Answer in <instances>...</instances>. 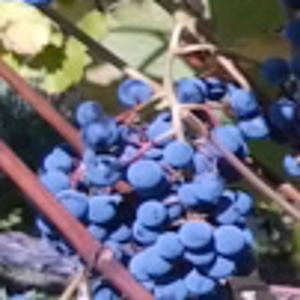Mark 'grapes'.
<instances>
[{"mask_svg": "<svg viewBox=\"0 0 300 300\" xmlns=\"http://www.w3.org/2000/svg\"><path fill=\"white\" fill-rule=\"evenodd\" d=\"M114 96V117L98 100L78 105L83 157L52 146L39 180L155 300H234L227 277L254 239L245 218L254 191L227 187L219 156L204 138L172 130L147 82L121 80Z\"/></svg>", "mask_w": 300, "mask_h": 300, "instance_id": "1", "label": "grapes"}, {"mask_svg": "<svg viewBox=\"0 0 300 300\" xmlns=\"http://www.w3.org/2000/svg\"><path fill=\"white\" fill-rule=\"evenodd\" d=\"M172 92L207 134L240 159L249 156L248 140H271L274 128H300V108L291 96L275 97L265 111L252 90L233 80L180 77Z\"/></svg>", "mask_w": 300, "mask_h": 300, "instance_id": "2", "label": "grapes"}, {"mask_svg": "<svg viewBox=\"0 0 300 300\" xmlns=\"http://www.w3.org/2000/svg\"><path fill=\"white\" fill-rule=\"evenodd\" d=\"M261 75L268 86H282L292 76L300 81V55L291 62L279 57H268L261 63Z\"/></svg>", "mask_w": 300, "mask_h": 300, "instance_id": "3", "label": "grapes"}, {"mask_svg": "<svg viewBox=\"0 0 300 300\" xmlns=\"http://www.w3.org/2000/svg\"><path fill=\"white\" fill-rule=\"evenodd\" d=\"M285 175L293 181L300 180V161L292 151H287L282 158Z\"/></svg>", "mask_w": 300, "mask_h": 300, "instance_id": "4", "label": "grapes"}, {"mask_svg": "<svg viewBox=\"0 0 300 300\" xmlns=\"http://www.w3.org/2000/svg\"><path fill=\"white\" fill-rule=\"evenodd\" d=\"M121 293L101 281H96L92 285V299L93 300H120Z\"/></svg>", "mask_w": 300, "mask_h": 300, "instance_id": "5", "label": "grapes"}, {"mask_svg": "<svg viewBox=\"0 0 300 300\" xmlns=\"http://www.w3.org/2000/svg\"><path fill=\"white\" fill-rule=\"evenodd\" d=\"M34 226L44 242H49L57 236V230L51 224H48L42 215H37L34 218Z\"/></svg>", "mask_w": 300, "mask_h": 300, "instance_id": "6", "label": "grapes"}]
</instances>
